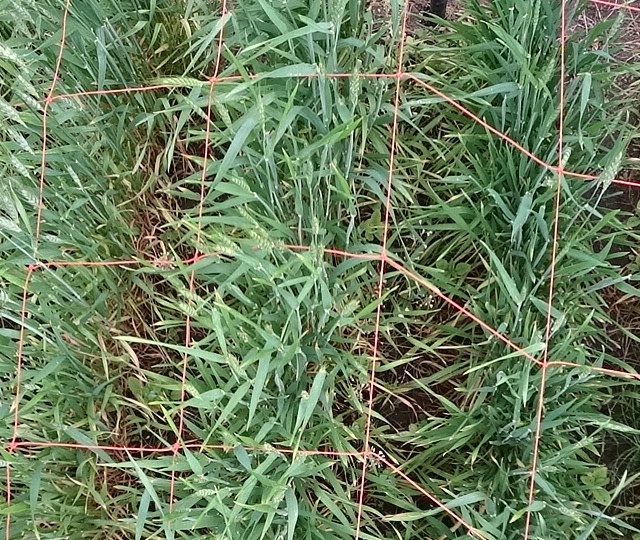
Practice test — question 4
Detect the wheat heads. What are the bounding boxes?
[0,100,23,126]
[3,193,23,220]
[12,0,30,19]
[25,382,39,391]
[179,292,204,308]
[229,179,248,190]
[0,45,24,67]
[257,95,268,130]
[223,430,237,445]
[265,442,274,452]
[551,242,570,262]
[214,244,234,259]
[0,215,19,235]
[6,128,30,149]
[227,354,247,379]
[24,188,46,209]
[18,76,37,95]
[158,75,197,88]
[178,92,206,115]
[6,16,28,36]
[214,96,234,131]
[237,207,257,223]
[602,152,618,183]
[180,302,197,318]
[299,389,311,401]
[181,385,199,400]
[14,89,42,113]
[67,167,77,186]
[549,96,565,128]
[248,232,271,251]
[542,60,555,84]
[351,66,360,105]
[41,232,65,246]
[6,151,28,177]
[218,227,240,251]
[558,146,573,170]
